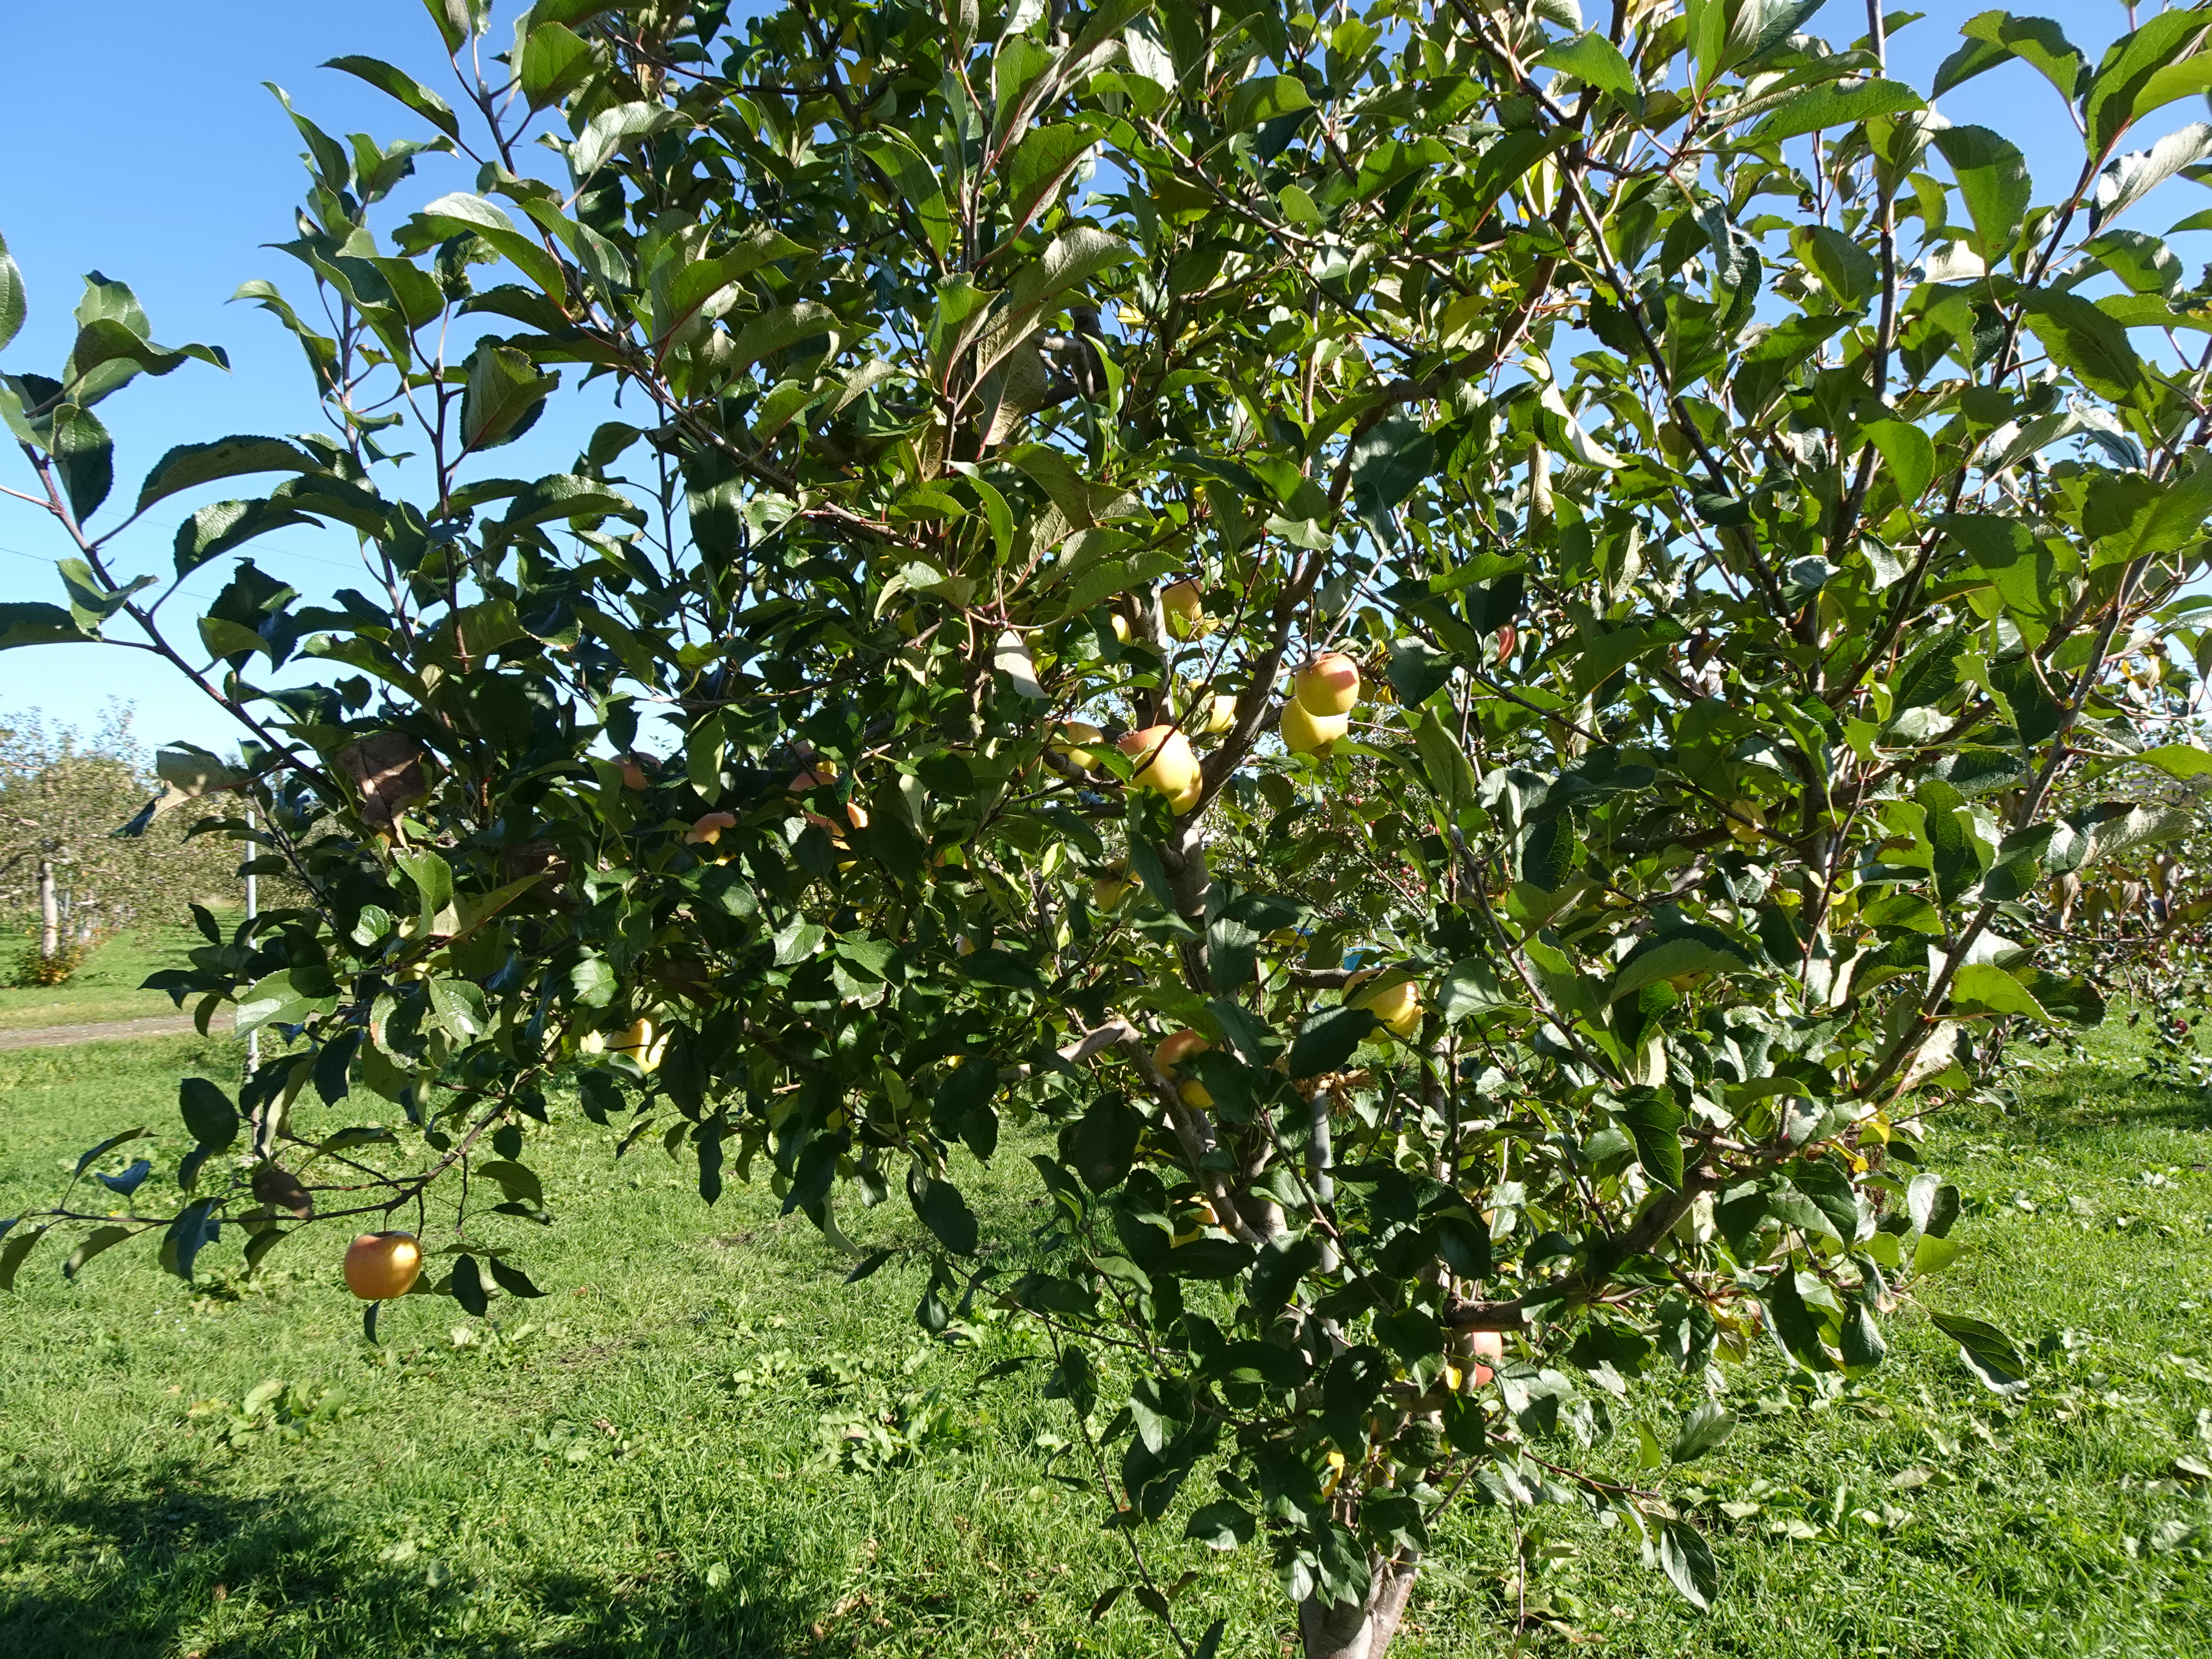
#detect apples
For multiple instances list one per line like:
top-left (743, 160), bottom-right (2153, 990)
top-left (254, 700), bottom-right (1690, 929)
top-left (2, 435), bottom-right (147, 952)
top-left (684, 813), bottom-right (737, 865)
top-left (1726, 800), bottom-right (1767, 843)
top-left (1110, 613), bottom-right (1131, 645)
top-left (1116, 725), bottom-right (1194, 801)
top-left (1093, 859), bottom-right (1142, 914)
top-left (402, 962), bottom-right (432, 982)
top-left (1041, 720), bottom-right (1104, 778)
top-left (344, 1230), bottom-right (423, 1301)
top-left (608, 752), bottom-right (662, 791)
top-left (956, 930), bottom-right (1008, 956)
top-left (1280, 695), bottom-right (1348, 754)
top-left (1342, 969), bottom-right (1423, 1044)
top-left (1295, 653), bottom-right (1360, 716)
top-left (1161, 579), bottom-right (1220, 642)
top-left (1169, 1192), bottom-right (1230, 1248)
top-left (789, 771), bottom-right (854, 804)
top-left (1472, 1332), bottom-right (1502, 1389)
top-left (1170, 754), bottom-right (1202, 817)
top-left (1494, 625), bottom-right (1515, 665)
top-left (1669, 972), bottom-right (1703, 992)
top-left (793, 740), bottom-right (838, 785)
top-left (805, 802), bottom-right (868, 871)
top-left (1152, 1029), bottom-right (1227, 1107)
top-left (1182, 679), bottom-right (1236, 733)
top-left (607, 1017), bottom-right (668, 1075)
